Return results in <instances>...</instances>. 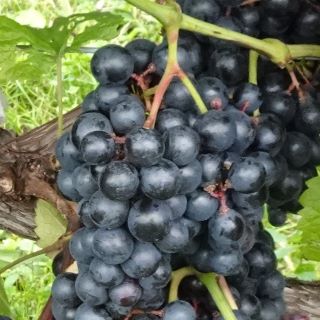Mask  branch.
Segmentation results:
<instances>
[{
	"label": "branch",
	"mask_w": 320,
	"mask_h": 320,
	"mask_svg": "<svg viewBox=\"0 0 320 320\" xmlns=\"http://www.w3.org/2000/svg\"><path fill=\"white\" fill-rule=\"evenodd\" d=\"M157 18L164 26H175L182 30L195 32L218 40L232 41L253 51L276 65L285 66L294 59L320 61V46L315 44H285L276 38L263 40L198 20L182 13L176 0H161V4L152 0H125Z\"/></svg>",
	"instance_id": "branch-1"
}]
</instances>
